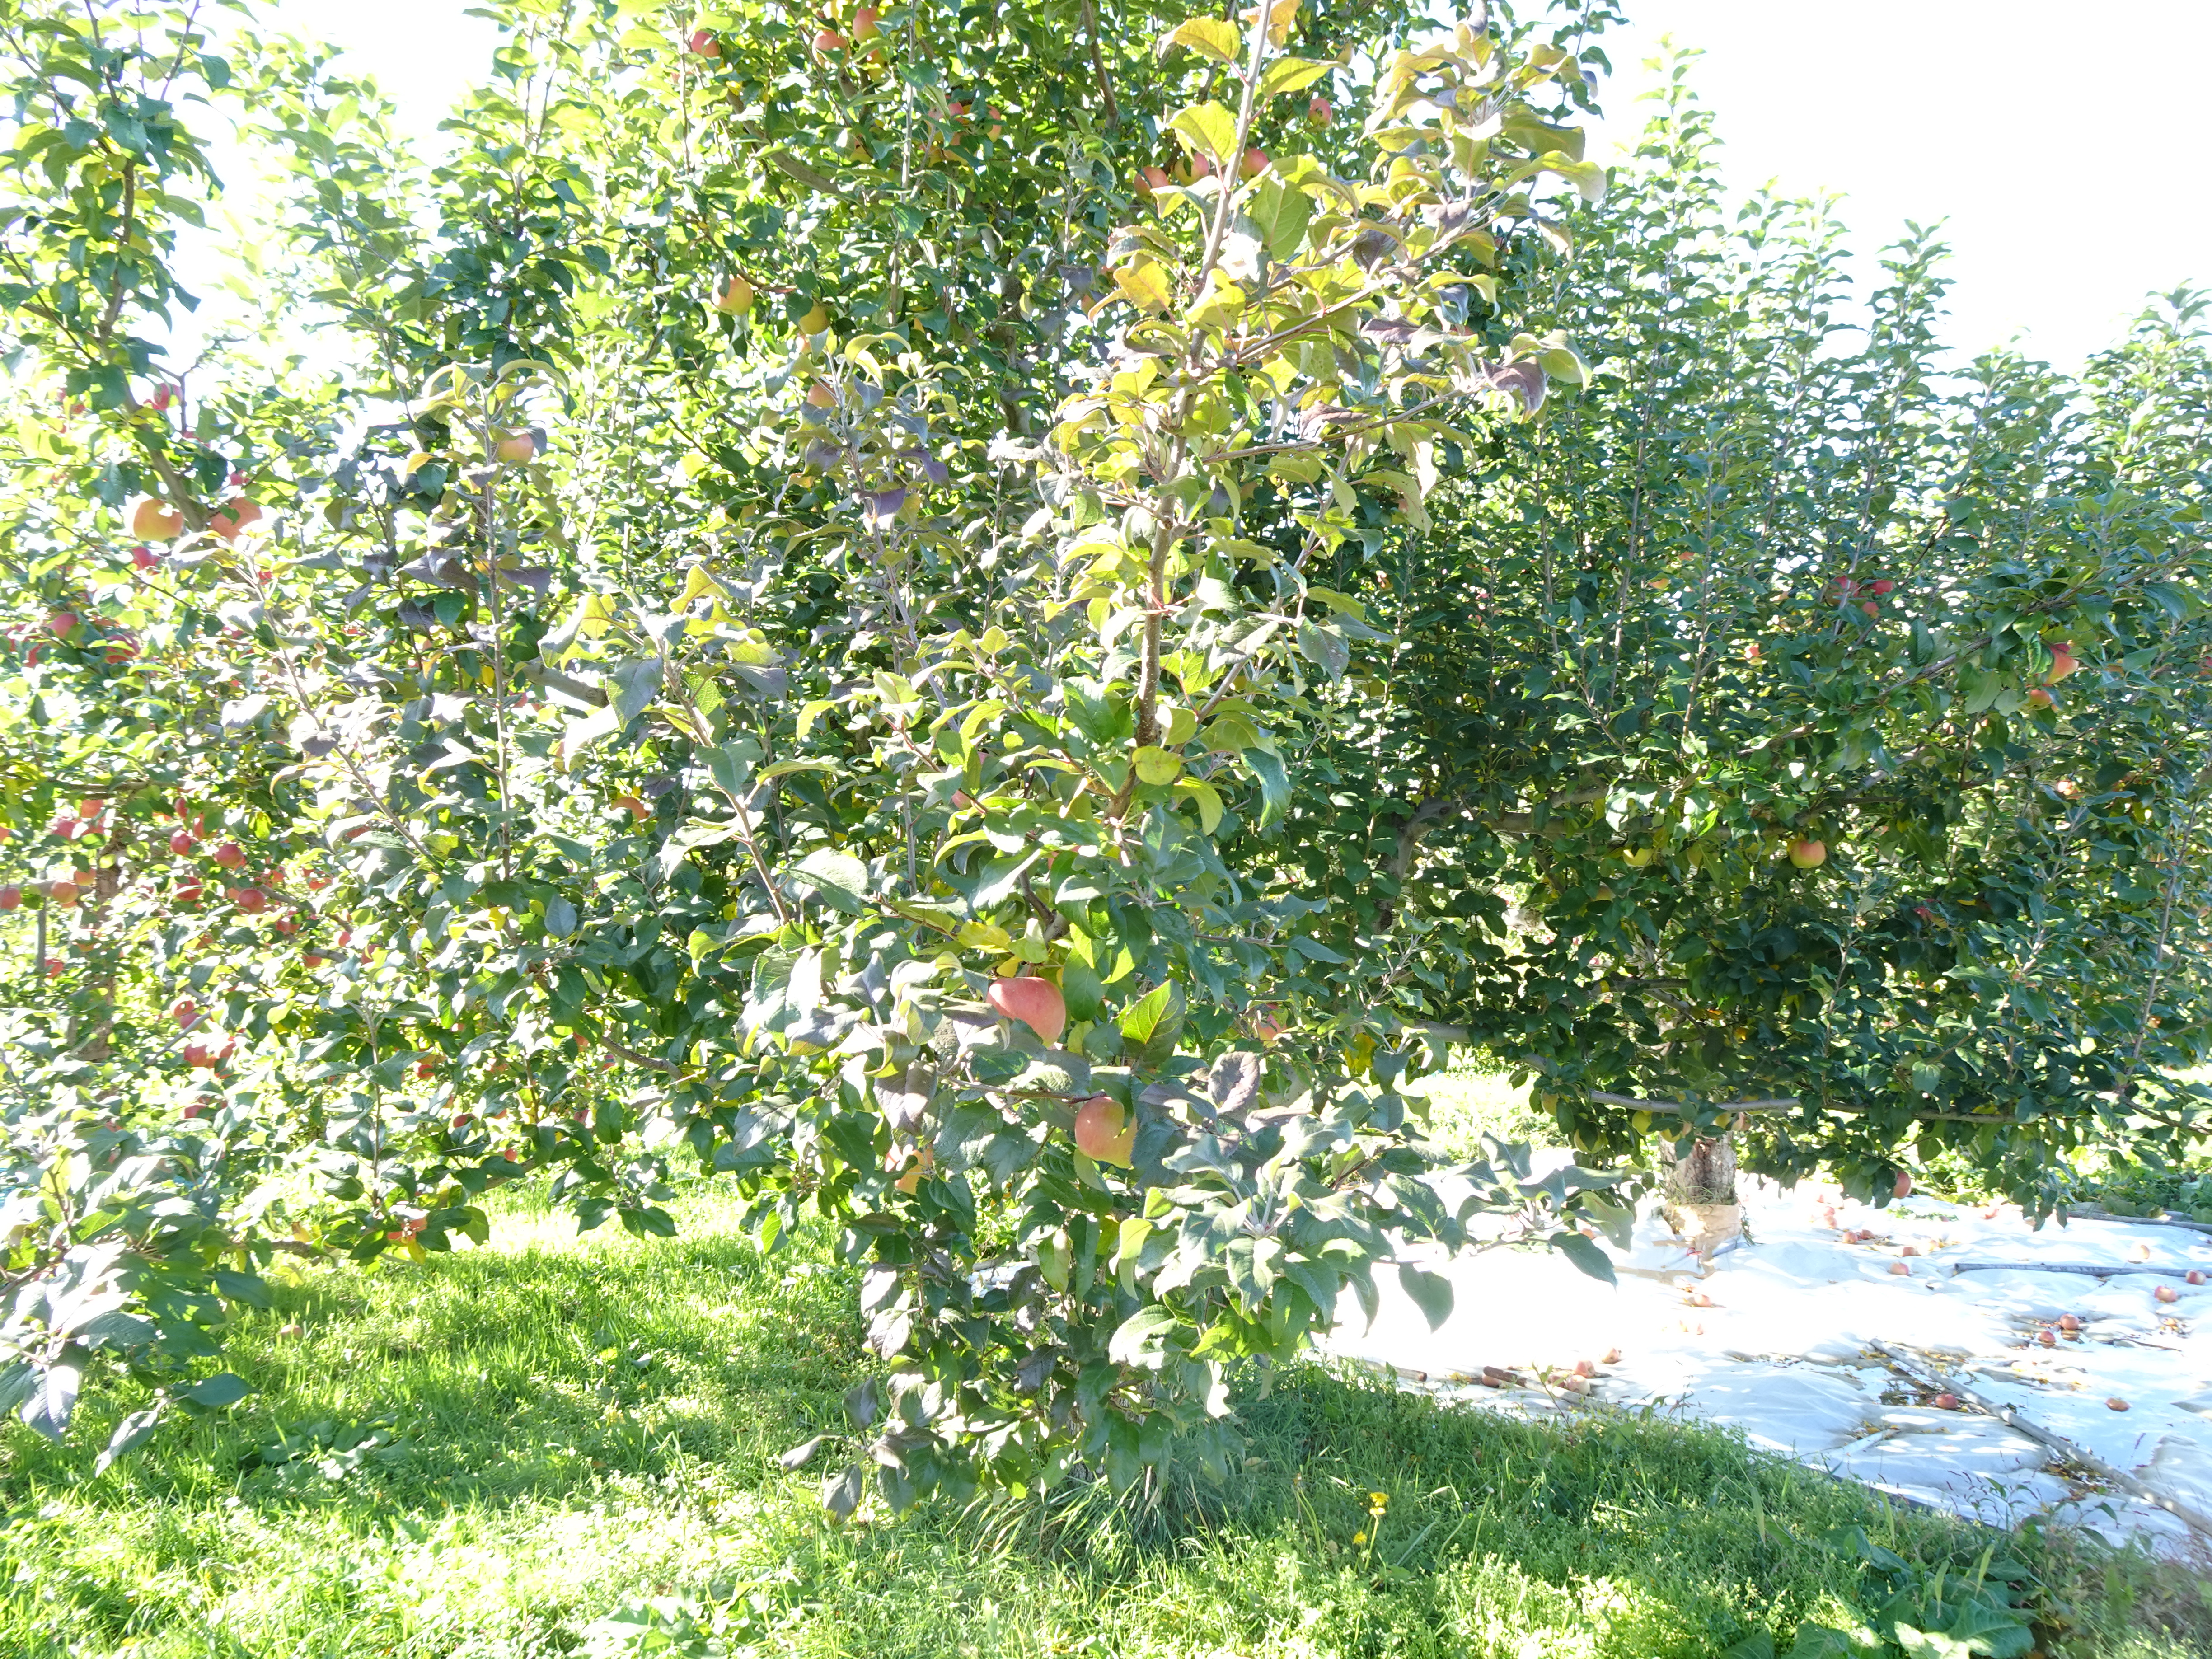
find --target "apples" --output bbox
[290,1213,324,1245]
[1499,895,1513,912]
[1080,265,1134,320]
[570,1099,600,1134]
[804,375,845,423]
[791,1164,819,1193]
[5,1220,42,1247]
[1600,993,1616,1007]
[1876,1164,1913,1200]
[770,514,807,557]
[432,443,478,480]
[321,1063,348,1090]
[944,101,1003,162]
[47,806,82,838]
[219,968,239,993]
[39,958,65,979]
[382,1207,430,1247]
[2022,979,2042,993]
[1284,872,1302,891]
[1124,1048,1162,1082]
[1912,894,1951,932]
[0,887,22,911]
[182,1037,221,1077]
[238,889,266,916]
[1237,146,1269,184]
[149,802,175,826]
[134,494,184,541]
[1879,1012,1899,1028]
[851,3,889,49]
[91,1119,127,1150]
[561,1066,595,1091]
[566,1028,592,1052]
[278,1321,303,1342]
[507,672,552,715]
[305,869,332,891]
[1464,612,1486,634]
[669,58,699,86]
[500,425,535,468]
[190,1089,235,1122]
[210,494,265,545]
[950,752,1000,811]
[757,410,789,444]
[1861,569,1896,616]
[83,543,107,564]
[221,621,257,657]
[1187,145,1228,186]
[192,811,219,839]
[176,793,203,816]
[799,299,832,336]
[1764,595,1801,625]
[1589,955,1604,968]
[80,797,107,824]
[218,1042,254,1072]
[607,795,648,832]
[169,994,208,1030]
[300,943,325,969]
[1914,977,1931,994]
[487,1099,509,1119]
[406,447,470,507]
[498,1143,521,1163]
[1073,1089,1148,1172]
[885,1137,937,1199]
[177,427,213,463]
[364,934,391,960]
[1574,1120,1606,1154]
[253,569,277,590]
[1715,1103,1745,1134]
[709,276,755,318]
[1644,560,1677,589]
[1632,1108,1663,1137]
[49,466,73,486]
[150,651,184,685]
[1353,1019,1384,1050]
[226,881,249,902]
[2101,777,2135,806]
[278,915,301,935]
[259,868,293,892]
[453,1111,479,1142]
[0,822,13,844]
[1825,577,1861,608]
[925,97,968,151]
[1541,1081,1581,1117]
[335,926,356,949]
[73,818,108,848]
[845,127,875,165]
[20,636,53,667]
[223,1031,256,1052]
[147,550,173,585]
[526,957,550,977]
[1301,96,1333,132]
[184,926,224,964]
[103,627,143,664]
[1,616,35,660]
[170,830,203,859]
[87,611,124,639]
[53,384,93,419]
[1064,408,1108,450]
[139,879,158,896]
[138,399,167,431]
[270,732,287,749]
[2196,653,2212,681]
[51,881,80,904]
[1689,831,1721,872]
[866,44,908,83]
[29,1263,63,1288]
[1252,1002,1290,1045]
[230,462,267,492]
[721,496,759,528]
[589,1045,617,1071]
[45,418,69,438]
[2010,966,2023,982]
[344,815,386,845]
[979,1188,1013,1220]
[449,1019,473,1039]
[1446,323,1475,358]
[153,380,187,411]
[395,658,427,682]
[652,1574,680,1599]
[69,926,104,954]
[2029,633,2080,685]
[1134,166,1170,203]
[1742,640,1769,666]
[1468,561,1492,588]
[373,626,397,648]
[1542,935,1556,948]
[1570,934,1583,947]
[2101,662,2129,684]
[71,862,99,885]
[980,974,1067,1051]
[260,656,289,680]
[812,26,851,69]
[1725,1027,1746,1045]
[1049,842,1097,883]
[212,841,245,869]
[2015,671,2054,711]
[1473,593,1507,624]
[340,615,370,645]
[1126,430,1171,480]
[2146,1018,2166,1032]
[415,623,452,661]
[39,604,85,649]
[1622,833,1659,868]
[1225,467,1261,515]
[1674,550,1712,586]
[543,1094,568,1113]
[439,1089,458,1108]
[2058,775,2089,800]
[415,1057,436,1080]
[208,672,241,704]
[53,554,79,579]
[115,541,155,580]
[689,28,722,60]
[552,739,594,772]
[787,472,829,515]
[204,1049,229,1073]
[438,487,481,523]
[1790,837,1826,869]
[483,1053,512,1080]
[170,874,205,900]
[182,1101,220,1139]
[1660,1114,1691,1144]
[2120,755,2155,790]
